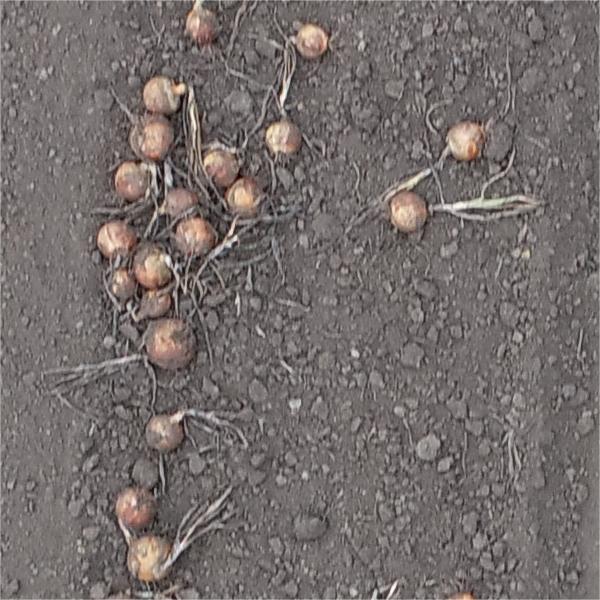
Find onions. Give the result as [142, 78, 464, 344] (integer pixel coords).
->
[264, 120, 299, 155]
[146, 412, 183, 450]
[183, 7, 217, 45]
[161, 184, 197, 220]
[138, 287, 171, 318]
[127, 533, 170, 579]
[171, 215, 213, 255]
[111, 162, 148, 199]
[445, 119, 484, 159]
[387, 190, 426, 233]
[132, 118, 172, 158]
[131, 243, 172, 287]
[202, 143, 237, 186]
[115, 486, 156, 530]
[145, 318, 194, 368]
[224, 178, 260, 214]
[142, 76, 178, 112]
[96, 221, 135, 258]
[293, 22, 327, 57]
[105, 268, 136, 297]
